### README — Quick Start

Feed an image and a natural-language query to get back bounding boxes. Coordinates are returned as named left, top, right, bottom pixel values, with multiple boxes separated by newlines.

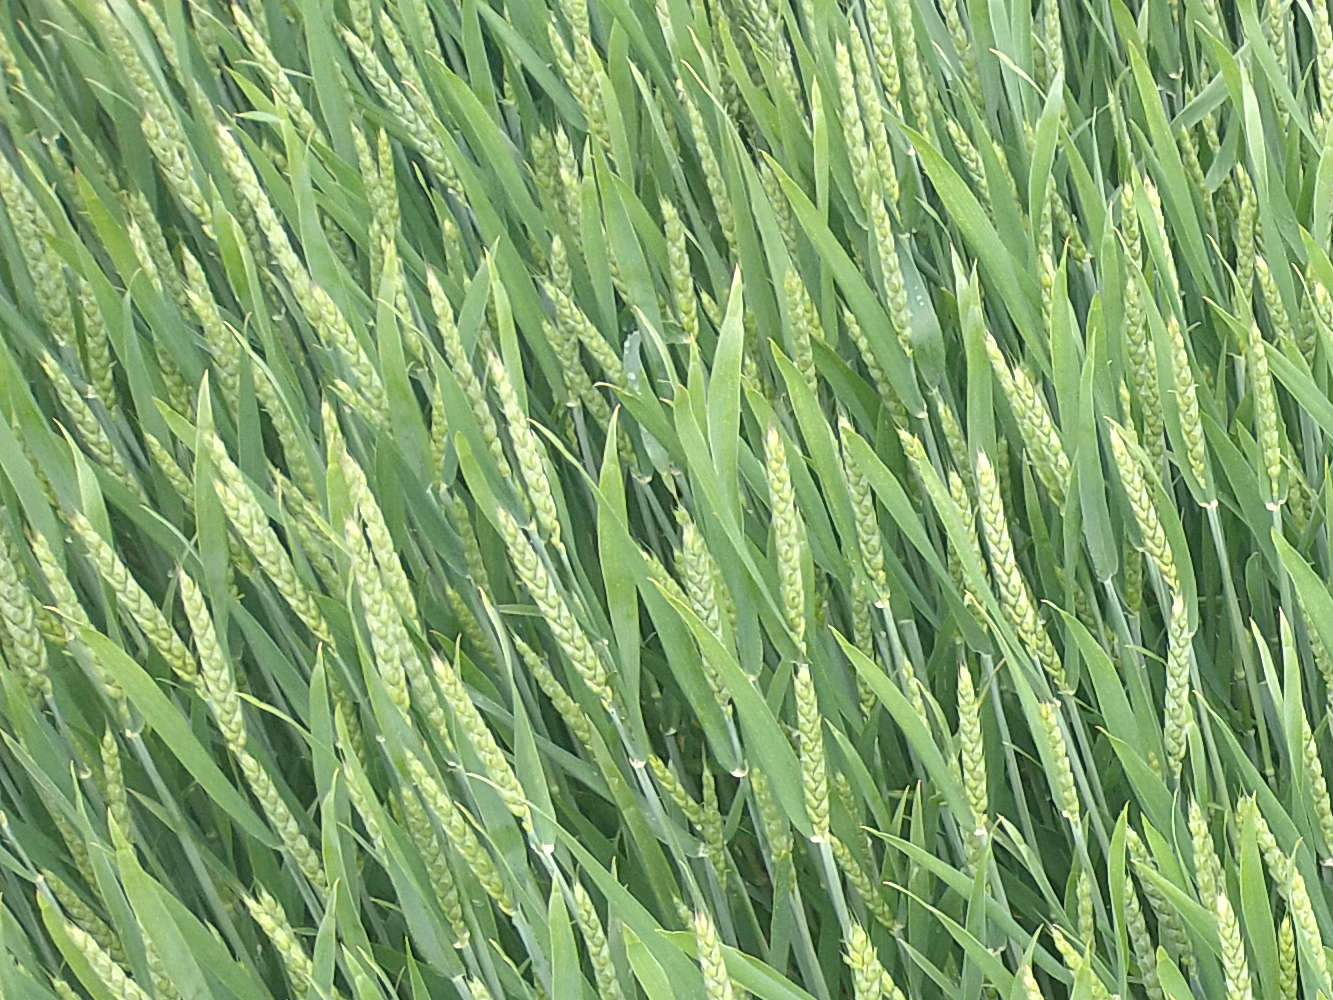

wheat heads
left=0, top=535, right=57, bottom=716
left=702, top=290, right=756, bottom=378
left=503, top=45, right=517, bottom=107
left=973, top=456, right=1033, bottom=646
left=839, top=415, right=888, bottom=602
left=983, top=332, right=1063, bottom=496
left=678, top=82, right=742, bottom=267
left=1264, top=0, right=1291, bottom=127
left=856, top=955, right=880, bottom=1000
left=140, top=117, right=214, bottom=238
left=941, top=523, right=964, bottom=591
left=143, top=194, right=180, bottom=290
left=1202, top=0, right=1225, bottom=38
left=156, top=328, right=199, bottom=414
left=927, top=72, right=991, bottom=213
left=1039, top=173, right=1055, bottom=258
left=1062, top=574, right=1105, bottom=639
left=1123, top=873, right=1171, bottom=1000
left=866, top=0, right=902, bottom=93
left=0, top=34, right=27, bottom=106
left=869, top=193, right=910, bottom=355
left=1164, top=597, right=1192, bottom=773
left=1188, top=797, right=1224, bottom=914
left=448, top=498, right=493, bottom=601
left=941, top=0, right=988, bottom=114
left=849, top=575, right=873, bottom=704
left=1125, top=519, right=1143, bottom=610
left=248, top=353, right=314, bottom=488
left=322, top=650, right=369, bottom=775
left=341, top=30, right=468, bottom=199
left=214, top=483, right=334, bottom=646
left=890, top=0, right=931, bottom=138
left=1112, top=425, right=1182, bottom=596
left=1055, top=192, right=1092, bottom=259
left=1120, top=184, right=1140, bottom=278
left=1298, top=287, right=1315, bottom=362
left=1255, top=257, right=1300, bottom=355
left=346, top=524, right=405, bottom=705
left=1311, top=0, right=1333, bottom=161
left=69, top=513, right=205, bottom=685
left=426, top=272, right=503, bottom=478
left=140, top=2, right=196, bottom=99
left=556, top=127, right=583, bottom=222
left=654, top=88, right=679, bottom=148
left=1178, top=127, right=1214, bottom=227
left=1238, top=194, right=1255, bottom=314
left=1238, top=164, right=1263, bottom=223
left=1139, top=172, right=1178, bottom=300
left=426, top=380, right=452, bottom=469
left=841, top=932, right=948, bottom=1000
left=346, top=395, right=406, bottom=441
left=129, top=222, right=161, bottom=294
left=100, top=11, right=168, bottom=112
left=546, top=237, right=582, bottom=362
left=674, top=896, right=697, bottom=934
left=673, top=509, right=754, bottom=635
left=1164, top=312, right=1211, bottom=489
left=209, top=438, right=271, bottom=525
left=1314, top=287, right=1333, bottom=399
left=187, top=0, right=221, bottom=62
left=436, top=661, right=530, bottom=822
left=1137, top=344, right=1163, bottom=479
left=562, top=0, right=597, bottom=88
left=572, top=884, right=632, bottom=1000
left=1078, top=869, right=1097, bottom=958
left=652, top=759, right=703, bottom=828
left=1274, top=855, right=1327, bottom=969
left=352, top=123, right=397, bottom=233
left=517, top=641, right=596, bottom=757
left=900, top=659, right=925, bottom=733
left=61, top=927, right=207, bottom=1000
left=1040, top=697, right=1080, bottom=822
left=497, top=510, right=612, bottom=706
left=394, top=260, right=426, bottom=362
left=724, top=0, right=773, bottom=97
left=178, top=571, right=248, bottom=757
left=1028, top=23, right=1052, bottom=83
left=82, top=272, right=124, bottom=404
left=842, top=303, right=909, bottom=428
left=1235, top=794, right=1282, bottom=870
left=48, top=364, right=134, bottom=498
left=1295, top=585, right=1333, bottom=705
left=708, top=0, right=768, bottom=141
left=939, top=405, right=984, bottom=495
left=1129, top=846, right=1198, bottom=974
left=958, top=663, right=986, bottom=809
left=1117, top=274, right=1148, bottom=392
left=837, top=765, right=862, bottom=824
left=1275, top=915, right=1300, bottom=1000
left=385, top=588, right=450, bottom=749
left=1017, top=114, right=1038, bottom=156
left=784, top=268, right=814, bottom=400
left=322, top=405, right=347, bottom=464
left=380, top=10, right=435, bottom=113
left=1055, top=931, right=1113, bottom=1000
left=825, top=830, right=890, bottom=927
left=487, top=352, right=562, bottom=539
left=0, top=153, right=78, bottom=344
left=694, top=754, right=724, bottom=884
left=248, top=0, right=274, bottom=40
left=948, top=470, right=989, bottom=571
left=540, top=328, right=637, bottom=465
left=137, top=919, right=197, bottom=1000
left=213, top=123, right=316, bottom=309
left=834, top=37, right=877, bottom=209
left=530, top=129, right=567, bottom=221
left=259, top=886, right=310, bottom=1000
left=344, top=451, right=417, bottom=616
left=1197, top=58, right=1223, bottom=146
left=221, top=164, right=284, bottom=312
left=661, top=201, right=693, bottom=330
left=233, top=746, right=332, bottom=897
left=543, top=22, right=616, bottom=139
left=406, top=752, right=516, bottom=902
left=223, top=7, right=329, bottom=143
left=367, top=221, right=385, bottom=299
left=981, top=966, right=999, bottom=1000
left=340, top=762, right=376, bottom=852
left=315, top=288, right=391, bottom=412
left=768, top=430, right=803, bottom=639
left=1217, top=891, right=1259, bottom=1000
left=48, top=795, right=101, bottom=893
left=1038, top=237, right=1056, bottom=350
left=761, top=154, right=800, bottom=268
left=1033, top=607, right=1068, bottom=674
left=799, top=275, right=828, bottom=334
left=1283, top=436, right=1306, bottom=525
left=48, top=138, right=93, bottom=222
left=448, top=588, right=500, bottom=677
left=1045, top=0, right=1074, bottom=139
left=348, top=0, right=376, bottom=40
left=1251, top=326, right=1282, bottom=480
left=96, top=721, right=138, bottom=840
left=756, top=0, right=812, bottom=127
left=753, top=753, right=790, bottom=852
left=681, top=524, right=732, bottom=699
left=793, top=663, right=824, bottom=835
left=901, top=432, right=936, bottom=492
left=185, top=289, right=239, bottom=425
left=1012, top=364, right=1073, bottom=488
left=44, top=872, right=129, bottom=971
left=243, top=900, right=320, bottom=984
left=541, top=279, right=632, bottom=387
left=393, top=0, right=447, bottom=61
left=382, top=127, right=401, bottom=227
left=743, top=302, right=772, bottom=359
left=1202, top=114, right=1238, bottom=201
left=183, top=242, right=218, bottom=304
left=402, top=788, right=466, bottom=938
left=141, top=435, right=251, bottom=565
left=445, top=219, right=466, bottom=270
left=38, top=539, right=98, bottom=629
left=849, top=16, right=902, bottom=199
left=1301, top=711, right=1333, bottom=860
left=698, top=916, right=762, bottom=1000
